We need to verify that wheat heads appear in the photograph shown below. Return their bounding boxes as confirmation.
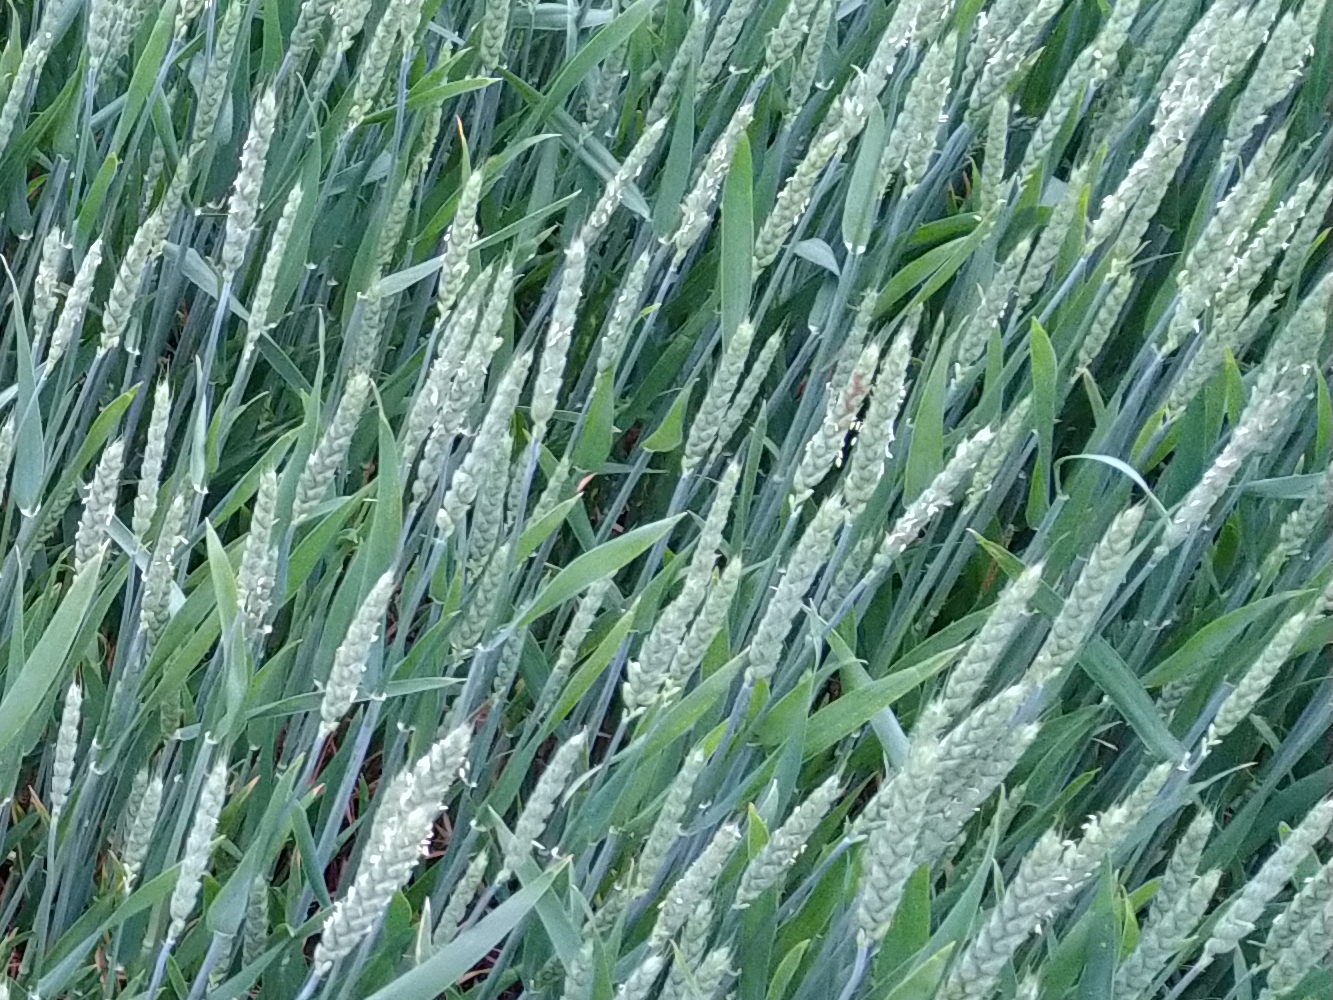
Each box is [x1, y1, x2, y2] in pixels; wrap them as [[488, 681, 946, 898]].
[[534, 244, 588, 421], [87, 0, 129, 62], [223, 92, 277, 273], [293, 376, 371, 521], [1096, 0, 1160, 74], [976, 0, 1065, 106], [358, 773, 413, 884], [968, 397, 1033, 499], [751, 132, 840, 277], [1171, 181, 1276, 340], [931, 705, 1016, 818], [595, 254, 651, 383], [1195, 184, 1321, 328], [291, 0, 382, 52], [192, 2, 243, 147], [663, 558, 742, 701], [433, 855, 488, 950], [142, 136, 166, 214], [1094, 132, 1164, 235], [97, 0, 179, 81], [1316, 581, 1333, 616], [345, 0, 409, 131], [1107, 766, 1169, 842], [1016, 169, 1087, 306], [400, 317, 475, 459], [1019, 46, 1098, 180], [1223, 0, 1312, 78], [466, 438, 514, 579], [0, 419, 16, 532], [1273, 464, 1333, 560], [744, 503, 845, 681], [1266, 276, 1332, 378], [844, 331, 912, 514], [579, 888, 628, 944], [473, 262, 517, 356], [438, 172, 484, 312], [133, 382, 173, 540], [930, 690, 1020, 782], [1163, 393, 1290, 545], [244, 184, 304, 352], [637, 904, 712, 1000], [1245, 366, 1278, 422], [538, 580, 610, 713], [243, 547, 280, 656], [682, 322, 754, 471], [1179, 136, 1284, 280], [912, 0, 949, 35], [352, 283, 384, 380], [480, 0, 520, 69], [1148, 671, 1201, 719], [917, 727, 1040, 863], [583, 120, 667, 241], [865, 433, 998, 579], [507, 25, 524, 62], [1167, 0, 1233, 107], [317, 809, 437, 966], [1026, 511, 1144, 684], [584, 36, 629, 128], [1287, 311, 1328, 390], [123, 781, 164, 890], [690, 465, 740, 584], [506, 451, 532, 519], [438, 266, 495, 351], [1157, 15, 1249, 129], [171, 760, 229, 934], [118, 771, 147, 854], [736, 779, 843, 905], [1108, 874, 1224, 1000], [1221, 17, 1290, 161], [33, 0, 75, 71], [936, 835, 1058, 1000], [1277, 0, 1330, 96], [0, 41, 39, 179], [1036, 826, 1116, 923], [908, 705, 940, 751], [150, 155, 191, 252], [1089, 57, 1142, 159], [236, 472, 278, 608], [968, 0, 1016, 79], [646, 13, 708, 125], [140, 497, 186, 659], [980, 99, 1010, 216], [423, 47, 450, 148], [697, 0, 765, 94], [622, 575, 708, 710], [401, 726, 474, 859], [491, 606, 529, 699], [1207, 613, 1305, 743], [766, 0, 854, 63], [789, 348, 880, 507], [1206, 801, 1333, 955], [312, 19, 340, 96], [529, 459, 571, 527], [349, 0, 409, 42], [1111, 147, 1186, 267], [101, 216, 158, 348], [47, 240, 104, 367], [1263, 859, 1332, 966], [850, 753, 932, 940], [1147, 0, 1225, 55], [675, 108, 752, 252], [830, 293, 878, 390], [903, 37, 959, 188], [450, 547, 511, 656], [786, 0, 835, 119], [31, 230, 63, 339], [321, 572, 396, 729], [1273, 184, 1333, 297], [1263, 908, 1333, 1000], [635, 749, 706, 895], [877, 39, 944, 189], [1073, 274, 1135, 374], [1144, 812, 1214, 930], [954, 239, 1031, 380], [375, 294, 397, 365], [922, 570, 1041, 742], [711, 335, 783, 452], [76, 442, 125, 577], [412, 350, 491, 504], [549, 944, 596, 1000], [651, 951, 730, 1000], [32, 478, 79, 545], [437, 355, 533, 529], [374, 181, 414, 275], [817, 536, 877, 622], [244, 876, 270, 965], [653, 825, 740, 946], [871, 0, 931, 89], [848, 780, 901, 835], [51, 684, 83, 815], [1231, 299, 1276, 355], [503, 748, 594, 876], [1008, 0, 1047, 36], [1166, 302, 1251, 415]]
